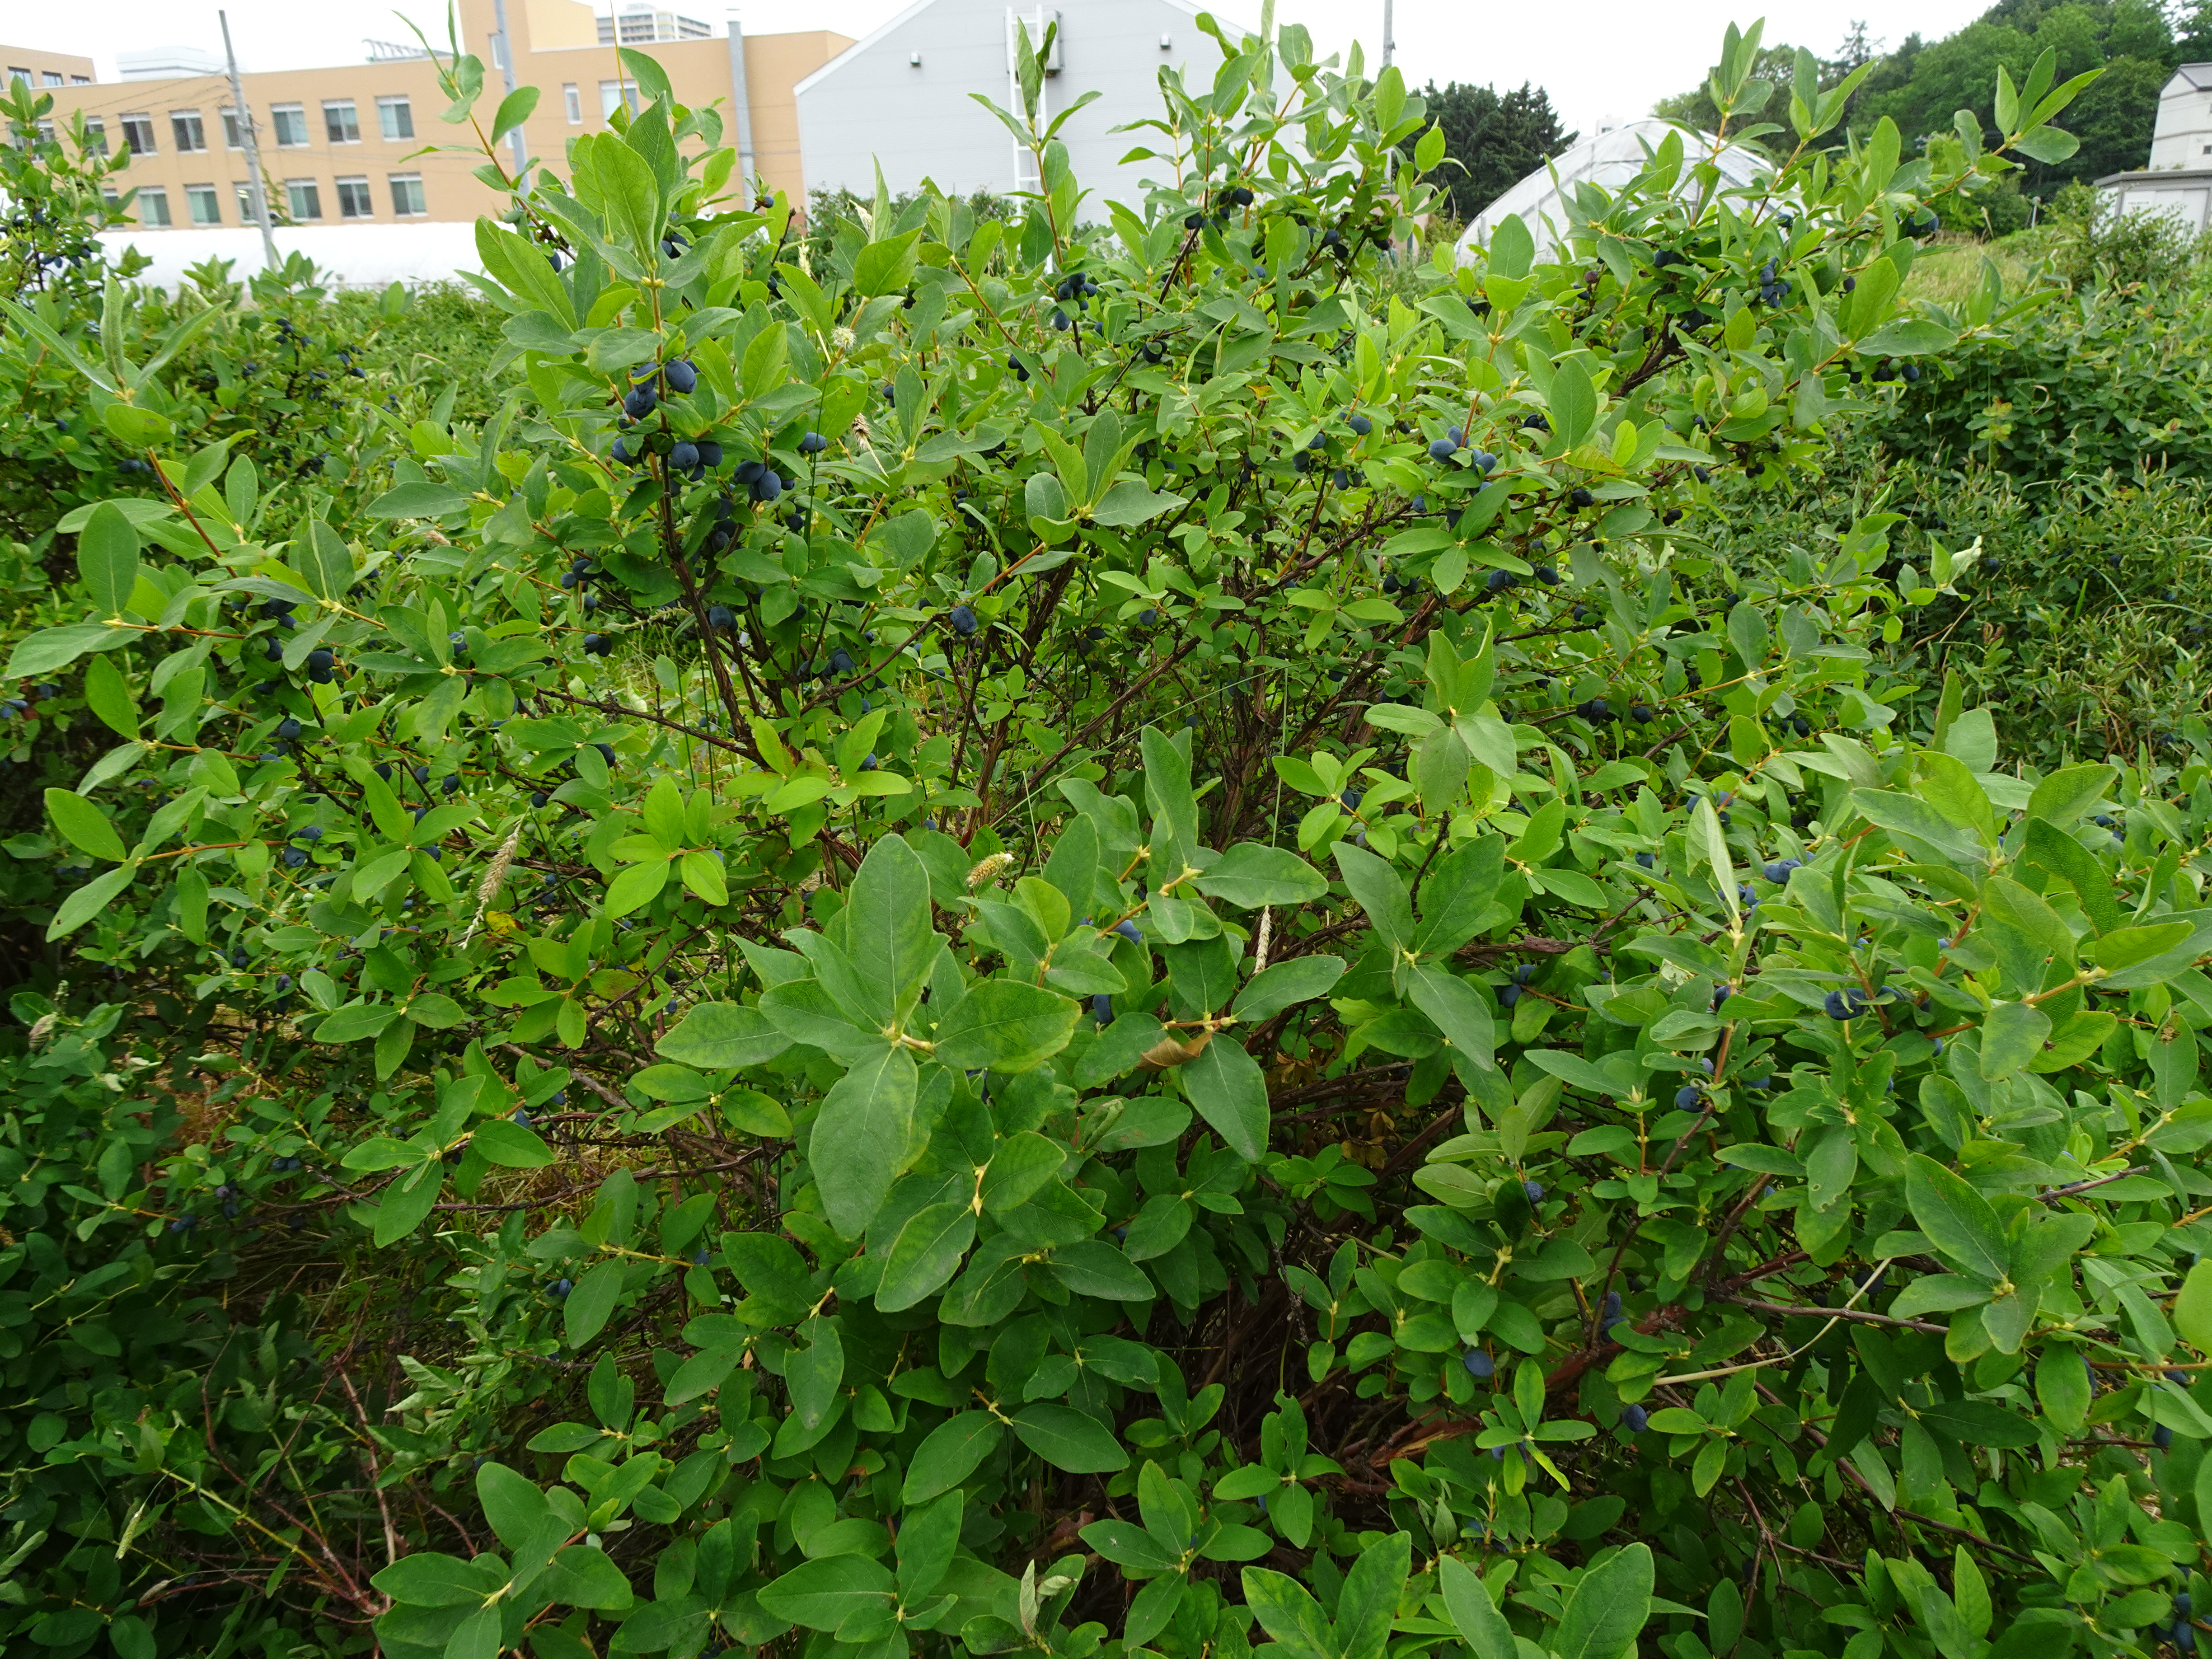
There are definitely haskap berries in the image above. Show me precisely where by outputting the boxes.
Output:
[541,893,553,906]
[1161,458,1175,470]
[1622,1403,1652,1432]
[275,975,289,992]
[1054,310,1071,331]
[682,464,705,480]
[1309,457,1323,472]
[789,498,807,513]
[316,880,325,888]
[719,484,737,499]
[551,1091,566,1105]
[1717,811,1730,827]
[1324,534,1332,543]
[1493,985,1504,1005]
[279,614,299,632]
[1597,257,1605,264]
[1073,284,1085,295]
[618,963,629,973]
[598,568,618,583]
[583,634,601,653]
[951,605,978,636]
[785,514,804,531]
[1337,408,1349,421]
[1612,346,1618,353]
[672,442,699,471]
[1486,304,1492,320]
[1775,284,1787,296]
[1597,973,1613,983]
[1715,733,1726,746]
[442,774,459,796]
[1529,562,1537,579]
[1502,982,1522,1009]
[666,999,677,1014]
[734,460,765,486]
[765,276,778,289]
[1721,288,1730,294]
[235,946,246,957]
[452,1153,462,1164]
[1750,899,1763,914]
[1721,265,1730,278]
[1155,341,1168,353]
[633,471,653,489]
[1112,1227,1127,1244]
[920,598,932,612]
[923,426,932,434]
[1754,464,1765,475]
[596,638,613,657]
[336,953,345,959]
[968,1071,991,1102]
[401,867,409,874]
[1433,588,1449,603]
[1880,368,1896,382]
[695,1248,710,1265]
[1765,1184,1777,1200]
[1139,608,1156,626]
[798,431,827,454]
[618,415,641,430]
[1219,206,1230,220]
[1249,266,1266,279]
[1715,791,1733,807]
[1511,965,1535,986]
[1572,315,1584,333]
[1197,486,1209,500]
[1185,715,1198,728]
[1240,677,1249,690]
[711,849,724,864]
[1713,984,1731,1013]
[1643,327,1651,344]
[271,741,290,757]
[594,742,618,767]
[1086,626,1106,641]
[874,677,889,688]
[416,764,435,783]
[797,660,813,678]
[956,499,967,513]
[1745,466,1755,479]
[1296,216,1308,229]
[1604,712,1616,721]
[1670,252,1684,266]
[1770,443,1779,454]
[1372,236,1391,250]
[1161,273,1178,285]
[1687,311,1704,328]
[731,603,748,613]
[1871,371,1879,383]
[1600,1292,1621,1319]
[261,754,280,763]
[223,1204,238,1219]
[991,664,1002,673]
[1764,865,1785,883]
[1652,248,1670,268]
[1678,313,1686,321]
[1257,1491,1267,1509]
[571,560,598,581]
[727,613,738,633]
[923,819,936,832]
[1589,714,1600,726]
[1188,282,1202,296]
[1308,433,1326,449]
[750,586,767,604]
[1396,694,1413,706]
[1321,519,1336,527]
[1778,859,1803,885]
[1600,1318,1630,1344]
[271,1157,287,1171]
[1383,573,1399,594]
[1399,423,1410,434]
[1158,329,1171,340]
[1761,717,1769,723]
[1142,454,1153,474]
[409,926,419,931]
[1894,213,1900,224]
[1938,938,1950,949]
[1759,271,1774,285]
[1312,524,1319,533]
[734,576,741,585]
[404,899,412,907]
[661,600,677,612]
[562,573,575,589]
[1593,338,1602,347]
[1333,244,1349,258]
[1736,449,1748,458]
[1303,552,1313,562]
[302,893,314,903]
[1446,425,1461,445]
[1767,293,1780,308]
[692,549,699,565]
[972,637,981,648]
[511,695,518,715]
[1843,357,1849,367]
[1142,343,1162,363]
[1016,366,1031,381]
[1324,230,1339,244]
[930,407,936,414]
[1728,593,1739,606]
[531,793,547,808]
[1695,415,1706,428]
[889,398,896,407]
[1725,1165,1740,1171]
[239,956,247,968]
[685,360,700,374]
[1569,688,1577,699]
[1090,548,1098,559]
[1771,632,1776,636]
[2095,816,2113,827]
[2153,1622,2173,1642]
[1786,712,1796,721]
[759,471,781,501]
[1347,470,1361,487]
[1284,813,1300,835]
[1571,485,1597,506]
[1187,1533,1197,1550]
[1771,424,1782,433]
[709,498,733,521]
[546,874,556,887]
[1350,822,1365,831]
[232,956,240,967]
[1888,359,1901,372]
[668,244,681,259]
[665,478,682,498]
[913,642,922,650]
[1227,678,1239,696]
[1095,321,1104,336]
[956,489,968,498]
[1707,267,1716,273]
[579,581,587,593]
[1007,458,1014,469]
[1688,674,1699,687]
[1142,718,1152,726]
[1545,672,1557,681]
[670,213,677,220]
[824,660,835,678]
[780,476,796,491]
[1334,468,1350,490]
[1835,636,1845,644]
[1856,937,1870,947]
[560,759,573,767]
[623,383,660,421]
[937,669,946,677]
[375,763,393,781]
[1448,508,1464,528]
[1233,188,1254,206]
[660,458,678,479]
[1090,660,1098,672]
[1687,796,1701,814]
[350,936,356,943]
[1524,1181,1545,1202]
[1932,1037,1943,1057]
[994,441,1006,452]
[831,648,848,674]
[984,652,991,664]
[1251,531,1261,543]
[392,1126,403,1134]
[1697,262,1706,268]
[1489,569,1509,590]
[660,240,672,253]
[231,596,250,612]
[583,595,596,611]
[983,449,997,459]
[179,1216,197,1229]
[571,754,576,761]
[699,716,710,727]
[1770,257,1779,267]
[1676,1084,1705,1113]
[663,358,697,393]
[307,651,334,670]
[749,486,762,504]
[1682,309,1693,316]
[882,385,895,398]
[1746,885,1758,906]
[1634,693,1644,701]
[571,843,581,852]
[1353,179,1360,191]
[1907,217,1921,237]
[449,631,471,656]
[1825,990,1865,1020]
[1505,572,1518,588]
[1722,721,1731,734]
[1761,285,1774,298]
[1202,219,1222,237]
[1166,442,1178,453]
[1794,720,1810,737]
[1004,546,1018,566]
[1574,285,1590,300]
[1782,281,1792,293]
[257,680,283,696]
[307,855,323,869]
[1012,456,1019,462]
[1403,577,1419,593]
[1493,1539,1512,1556]
[790,603,806,620]
[1521,414,1540,428]
[1746,1075,1769,1090]
[1581,535,1599,553]
[1739,457,1748,467]
[865,631,874,644]
[1264,443,1274,463]
[1875,986,1903,1013]
[216,949,227,959]
[267,595,300,616]
[228,1180,239,1191]
[1135,442,1148,458]
[172,1222,184,1233]
[2175,1620,2198,1650]
[1468,298,1478,318]
[379,929,393,940]
[142,779,156,786]
[1592,699,1606,716]
[674,236,688,247]
[1842,276,1855,291]
[1742,289,1756,305]
[835,654,855,674]
[1669,507,1683,521]
[1464,1348,1495,1378]
[253,638,268,655]
[928,676,935,681]
[1412,494,1428,514]
[571,832,579,840]
[767,419,776,442]
[727,727,735,738]
[559,1278,572,1298]
[1635,850,1656,870]
[216,1184,230,1198]
[1007,355,1022,369]
[1585,271,1597,283]
[1240,470,1251,483]
[1742,444,1749,453]
[1044,570,1056,581]
[1185,211,1202,231]
[1356,832,1367,847]
[306,967,317,972]
[989,669,995,675]
[283,846,306,867]
[1720,882,1747,901]
[1474,481,1493,494]
[57,866,66,876]
[309,884,318,893]
[1351,789,1362,807]
[1067,270,1086,286]
[2113,829,2125,842]
[1327,671,1344,681]
[1213,267,1222,275]
[1666,424,1671,430]
[280,719,301,739]
[263,634,286,662]
[1294,461,1310,473]
[1113,343,1121,347]
[1777,215,1792,227]
[1720,436,1736,443]
[1289,541,1302,558]
[1654,509,1674,526]
[1847,369,1862,383]
[1292,450,1310,465]
[1462,428,1470,448]
[1502,712,1513,724]
[1409,826,1422,837]
[2202,1615,2212,1627]
[545,249,562,274]
[621,921,633,931]
[1998,836,2006,848]
[420,844,442,863]
[1428,438,1457,465]
[1536,676,1549,688]
[694,566,706,578]
[1854,944,1864,952]
[1180,242,1192,254]
[634,358,665,389]
[1220,191,1231,205]
[1074,297,1089,311]
[1564,504,1579,514]
[1058,283,1071,300]
[1245,454,1259,470]
[315,647,334,656]
[1701,1058,1715,1075]
[1492,1444,1505,1459]
[762,196,775,208]
[1340,790,1354,814]
[2150,1382,2164,1394]
[1469,1521,1484,1546]
[1474,453,1497,474]
[697,439,722,467]
[2165,1368,2189,1388]
[1723,614,1729,626]
[516,1110,530,1129]
[1680,324,1690,330]
[1537,566,1559,586]
[2077,1353,2096,1394]
[291,1216,305,1227]
[490,717,509,733]
[709,606,731,630]
[1780,722,1788,732]
[1819,639,1825,646]
[1523,540,1543,556]
[1795,852,1817,864]
[1468,449,1482,461]
[1212,552,1222,565]
[1082,282,1098,298]
[547,1280,560,1296]
[1573,605,1588,621]
[1282,575,1295,588]
[1701,313,1712,325]
[1081,915,1089,925]
[1884,1076,1894,1095]
[1900,362,1919,381]
[505,210,523,224]
[840,598,865,608]
[963,502,989,526]
[1922,215,1939,230]
[1309,228,1317,241]
[1092,992,1111,1025]
[1380,689,1395,703]
[1478,301,1487,311]
[611,435,630,460]
[903,299,912,310]
[1273,430,1280,436]
[307,668,334,685]
[1577,700,1593,718]
[907,290,918,303]
[716,519,739,538]
[2152,1423,2173,1448]
[299,826,323,841]
[159,795,168,802]
[415,808,427,825]
[1134,889,1145,901]
[860,698,871,713]
[1115,918,1140,945]
[1686,262,1693,267]
[524,823,535,834]
[684,624,697,640]
[532,912,540,921]
[1540,414,1550,428]
[1349,416,1373,435]
[2177,1594,2193,1614]
[1759,264,1775,274]
[287,1159,302,1170]
[1688,465,1708,484]
[1857,1272,1884,1294]
[860,752,877,769]
[713,531,731,556]
[1632,705,1651,724]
